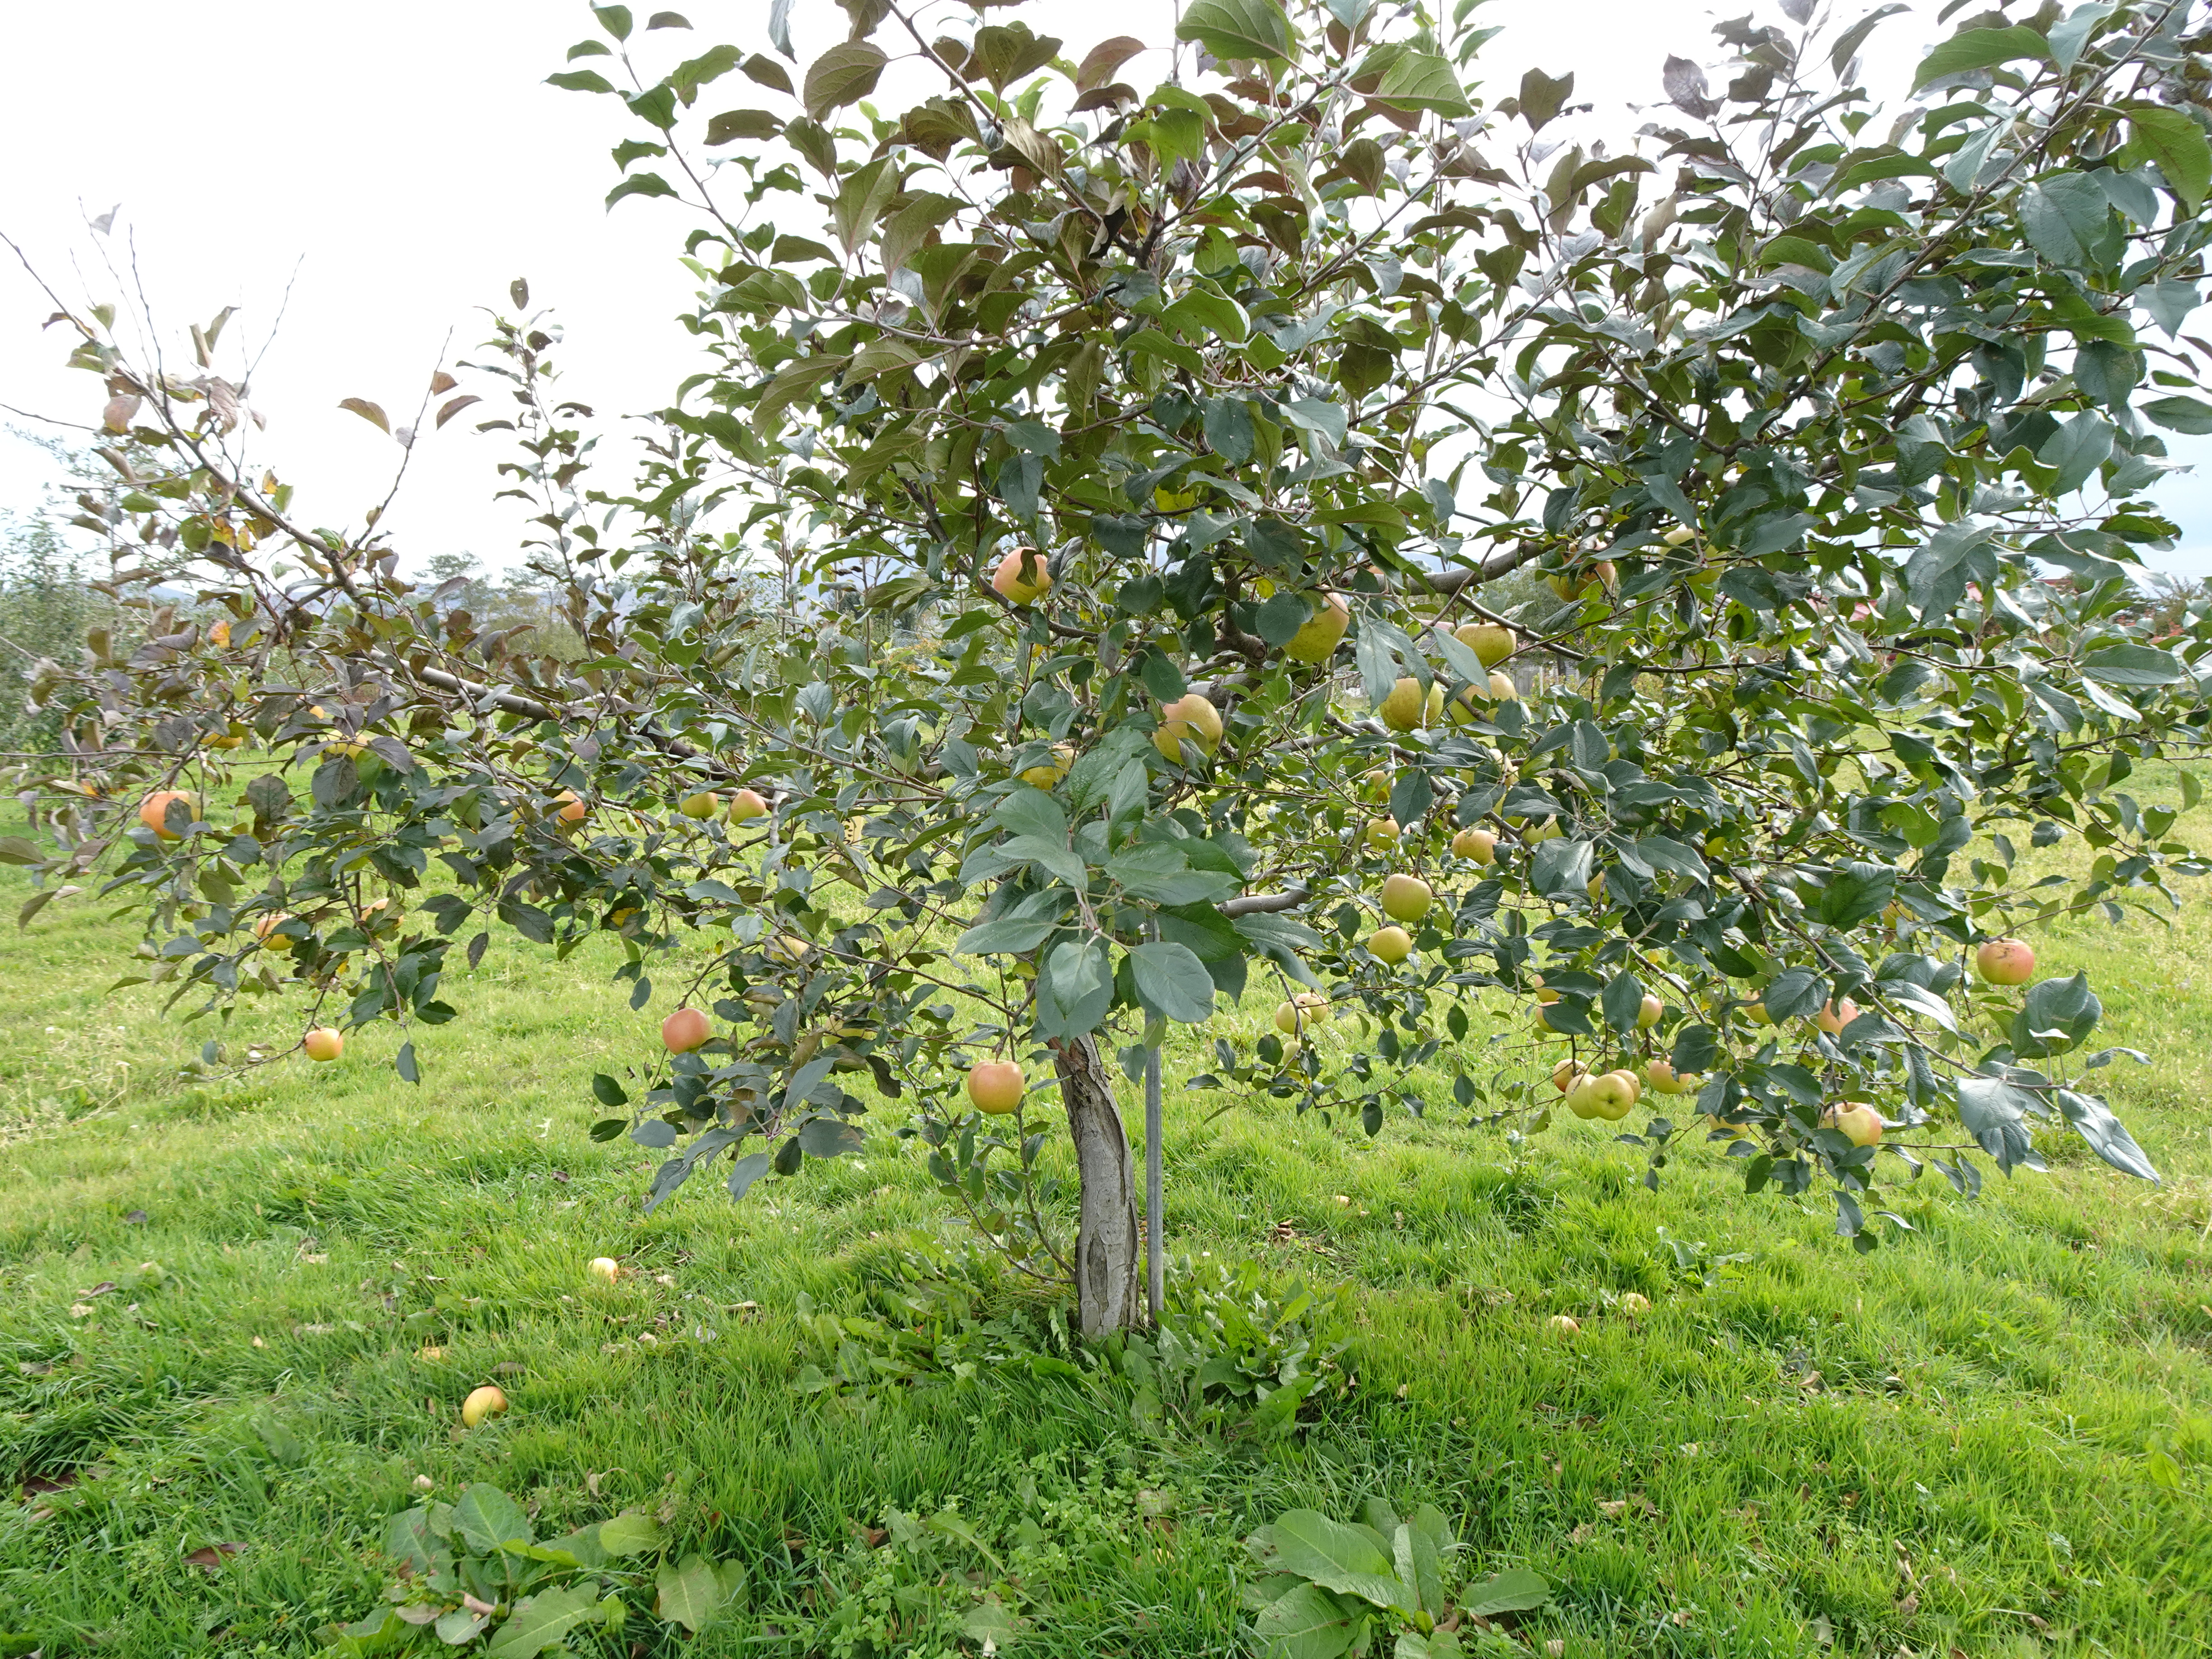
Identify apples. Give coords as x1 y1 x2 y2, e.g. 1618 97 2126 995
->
992 546 1053 605
1021 756 1070 791
1492 792 1527 828
968 1059 1025 1114
662 1008 711 1056
679 788 718 818
1152 694 1222 766
1281 1041 1316 1070
730 790 766 829
553 790 584 828
1553 1058 1590 1092
1450 670 1517 726
256 913 294 950
1362 770 1392 799
1977 938 2034 985
1452 829 1496 865
1659 529 1727 585
1535 976 1560 1003
1648 1059 1691 1094
1366 817 1400 851
1380 678 1444 733
1453 622 1516 670
360 898 403 938
140 790 199 841
1805 998 1858 1041
320 730 368 765
1281 583 1349 662
500 801 525 834
1275 1001 1311 1034
1510 766 1529 790
1744 989 1773 1025
769 935 810 964
1048 745 1079 759
1520 814 1564 845
1709 1103 1749 1140
1587 1074 1634 1120
1459 749 1513 788
1565 1074 1598 1119
1368 926 1412 966
1536 1001 1559 1033
1882 900 1921 930
1295 992 1328 1023
1822 1102 1881 1148
823 1014 872 1047
305 1028 343 1061
1636 993 1662 1028
309 706 324 719
1367 565 1383 575
1610 1069 1641 1104
1546 538 1616 602
1382 873 1432 922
